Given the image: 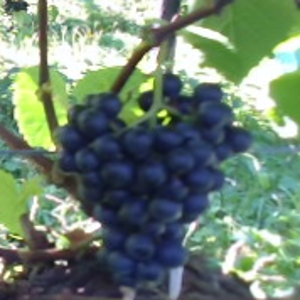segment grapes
Here are the masks:
<instances>
[{"mask_svg": "<svg viewBox=\"0 0 300 300\" xmlns=\"http://www.w3.org/2000/svg\"><path fill=\"white\" fill-rule=\"evenodd\" d=\"M182 94L176 77L161 76L140 96L137 123L127 126L117 118L115 93L91 94L69 108V122L54 134L59 168L78 174V194L104 223L108 242L99 258L122 288L155 280L162 265L185 264L184 225L206 210V192L225 183L214 164L252 143L248 129L232 125L216 85H199L192 99Z\"/></svg>", "mask_w": 300, "mask_h": 300, "instance_id": "01657485", "label": "grapes"}]
</instances>
